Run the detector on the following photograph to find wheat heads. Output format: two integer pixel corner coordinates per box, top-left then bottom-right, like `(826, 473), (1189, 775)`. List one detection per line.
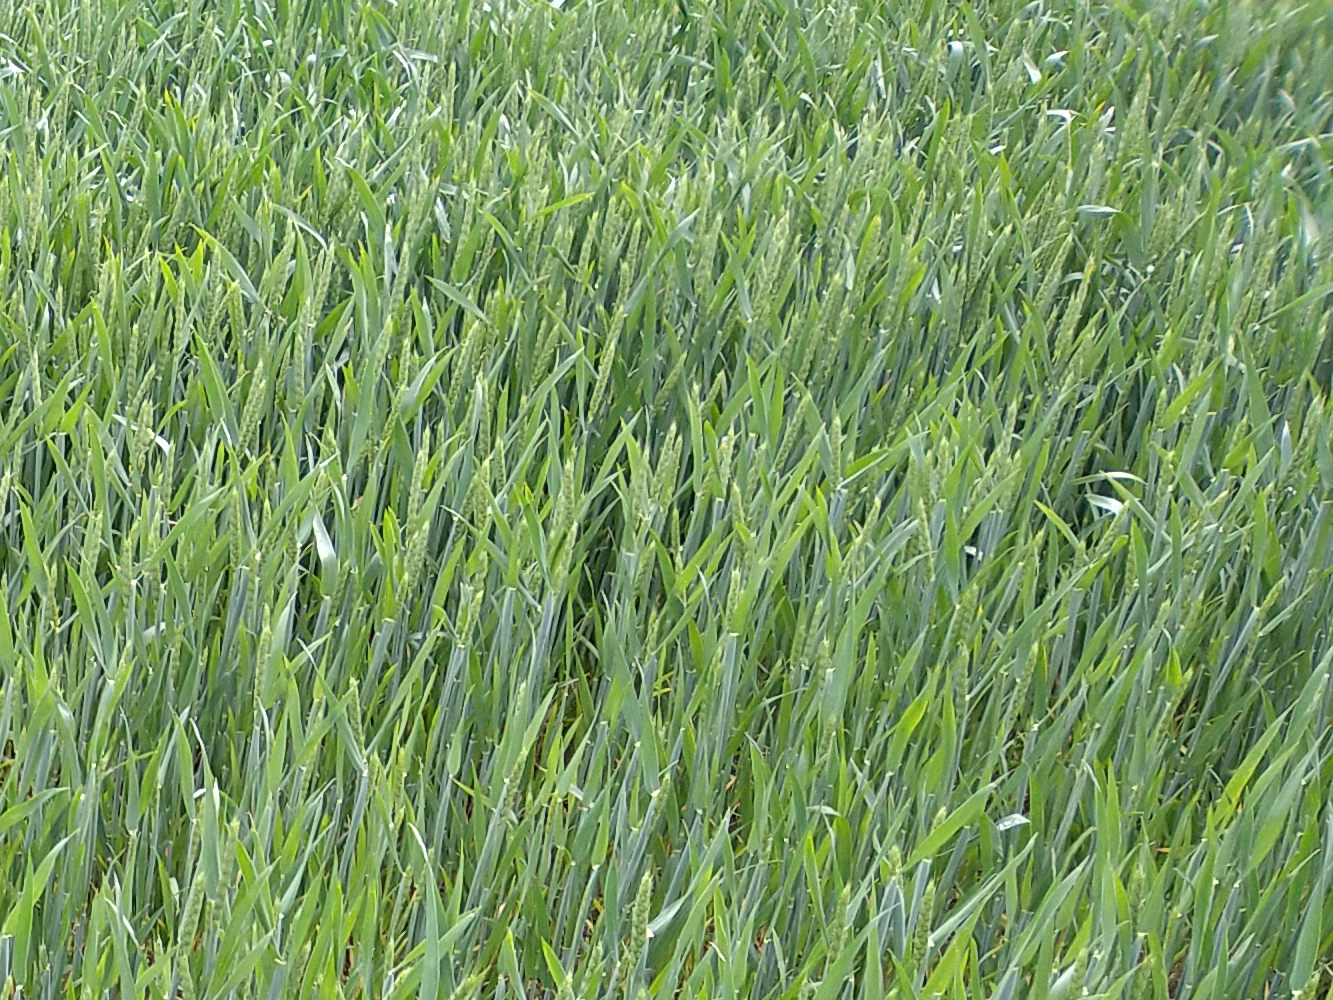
(547, 51), (564, 104)
(589, 68), (601, 112)
(488, 288), (503, 356)
(389, 244), (411, 328)
(541, 7), (552, 72)
(476, 227), (498, 291)
(551, 845), (562, 899)
(6, 286), (21, 326)
(272, 346), (287, 426)
(249, 557), (259, 621)
(662, 281), (677, 338)
(405, 533), (418, 575)
(215, 111), (229, 177)
(97, 511), (112, 580)
(757, 214), (792, 329)
(449, 319), (484, 409)
(422, 424), (429, 463)
(181, 26), (189, 48)
(1033, 235), (1072, 310)
(911, 520), (921, 570)
(457, 192), (478, 259)
(53, 291), (64, 385)
(850, 76), (869, 115)
(282, 943), (309, 1000)
(771, 232), (800, 310)
(0, 569), (8, 615)
(555, 225), (577, 295)
(1223, 420), (1251, 475)
(66, 25), (78, 74)
(847, 198), (870, 249)
(725, 568), (741, 630)
(230, 492), (244, 582)
(920, 453), (934, 503)
(416, 976), (479, 1000)
(328, 623), (338, 674)
(369, 750), (378, 791)
(231, 191), (243, 252)
(82, 0), (93, 54)
(654, 420), (676, 514)
(135, 291), (155, 346)
(817, 315), (848, 385)
(126, 226), (134, 264)
(21, 170), (46, 272)
(541, 224), (564, 278)
(168, 178), (179, 214)
(913, 881), (934, 980)
(1271, 264), (1292, 325)
(827, 198), (848, 277)
(710, 371), (722, 404)
(525, 794), (533, 842)
(799, 281), (845, 376)
(1150, 388), (1168, 442)
(794, 620), (807, 664)
(350, 679), (365, 759)
(816, 168), (840, 242)
(1278, 400), (1326, 506)
(967, 466), (999, 520)
(122, 537), (133, 608)
(28, 91), (42, 124)
(652, 352), (689, 413)
(906, 446), (918, 518)
(771, 392), (810, 480)
(280, 0), (297, 64)
(25, 137), (32, 184)
(175, 955), (194, 1000)
(122, 323), (140, 409)
(752, 314), (774, 355)
(837, 481), (861, 531)
(407, 62), (431, 142)
(819, 712), (836, 762)
(870, 466), (878, 523)
(494, 434), (505, 490)
(1186, 553), (1207, 585)
(403, 340), (414, 385)
(730, 0), (759, 37)
(11, 654), (21, 711)
(1153, 212), (1174, 256)
(998, 647), (1038, 743)
(345, 433), (373, 478)
(333, 558), (349, 619)
(578, 943), (602, 1000)
(262, 495), (268, 529)
(163, 445), (175, 509)
(939, 265), (967, 351)
(212, 159), (242, 222)
(238, 970), (250, 1000)
(312, 249), (325, 288)
(126, 26), (139, 75)
(689, 0), (717, 86)
(82, 418), (91, 475)
(479, 380), (486, 458)
(31, 346), (40, 416)
(701, 648), (721, 721)
(1169, 42), (1186, 72)
(954, 651), (967, 725)
(548, 976), (572, 1000)
(740, 549), (754, 607)
(967, 217), (988, 284)
(891, 385), (914, 446)
(935, 159), (948, 229)
(1139, 12), (1156, 58)
(1163, 70), (1201, 150)
(723, 430), (734, 492)
(383, 388), (411, 444)
(1037, 189), (1058, 241)
(75, 240), (89, 319)
(77, 324), (87, 373)
(462, 122), (477, 185)
(89, 25), (99, 91)
(648, 772), (668, 827)
(420, 171), (453, 239)
(637, 542), (652, 593)
(1167, 250), (1186, 332)
(1158, 453), (1177, 515)
(215, 194), (234, 247)
(1245, 264), (1270, 343)
(381, 939), (395, 990)
(729, 481), (745, 524)
(175, 280), (185, 363)
(528, 188), (547, 265)
(733, 70), (755, 91)
(0, 977), (14, 1000)
(201, 17), (214, 63)
(19, 318), (28, 371)
(408, 449), (423, 518)
(775, 317), (800, 375)
(808, 598), (825, 660)
(254, 624), (270, 725)
(545, 789), (560, 841)
(586, 314), (622, 421)
(9, 357), (29, 413)
(920, 506), (937, 584)
(578, 210), (598, 289)
(630, 216), (639, 294)
(305, 714), (323, 801)
(499, 752), (524, 819)
(325, 152), (346, 212)
(309, 245), (341, 320)
(674, 508), (680, 556)
(992, 21), (1022, 74)
(408, 522), (431, 589)
(234, 383), (262, 455)
(420, 851), (430, 892)
(233, 105), (241, 142)
(233, 363), (248, 405)
(395, 868), (411, 914)
(313, 380), (326, 434)
(870, 133), (895, 182)
(64, 460), (76, 521)
(147, 529), (160, 603)
(164, 187), (187, 251)
(1100, 500), (1127, 557)
(518, 152), (548, 219)
(154, 510), (160, 543)
(264, 442), (275, 512)
(211, 821), (239, 929)
(831, 416), (841, 500)
(878, 233), (915, 334)
(251, 416), (258, 459)
(685, 158), (709, 212)
(821, 642), (831, 702)
(173, 872), (205, 970)
(532, 315), (550, 358)
(635, 447), (648, 519)
(1186, 282), (1222, 395)
(243, 359), (263, 404)
(964, 266), (984, 335)
(697, 175), (716, 229)
(1243, 231), (1272, 296)
(390, 575), (412, 624)
(503, 63), (519, 119)
(1004, 469), (1026, 519)
(437, 418), (443, 470)
(1201, 212), (1236, 296)
(991, 400), (1018, 469)
(452, 481), (475, 541)
(550, 493), (565, 538)
(268, 520), (283, 556)
(1250, 572), (1289, 658)
(325, 425), (337, 471)
(159, 306), (176, 375)
(1124, 523), (1139, 598)
(1277, 976), (1319, 1000)
(407, 159), (422, 239)
(136, 226), (151, 268)
(288, 512), (298, 576)
(1045, 191), (1069, 245)
(134, 401), (153, 475)
(845, 122), (873, 201)
(336, 138), (369, 236)
(474, 456), (487, 534)
(602, 262), (630, 363)
(14, 413), (26, 490)
(391, 290), (420, 354)
(206, 250), (222, 338)
(648, 609), (659, 667)
(1130, 957), (1157, 1000)
(181, 182), (205, 244)
(1177, 599), (1203, 654)
(1063, 949), (1088, 1000)
(364, 320), (392, 389)
(1051, 434), (1069, 486)
(465, 591), (484, 635)
(123, 88), (144, 165)
(42, 567), (59, 643)
(698, 219), (722, 314)
(600, 200), (617, 269)
(635, 871), (654, 987)
(86, 199), (105, 286)
(608, 955), (627, 1000)
(1046, 373), (1076, 443)
(672, 174), (687, 219)
(190, 798), (205, 868)
(559, 520), (578, 579)
(1179, 184), (1190, 233)
(1154, 669), (1194, 751)
(13, 2), (32, 37)
(906, 68), (934, 121)
(200, 443), (205, 499)
(939, 437), (953, 494)
(193, 568), (205, 610)
(251, 199), (271, 272)
(154, 454), (166, 490)
(897, 21), (911, 54)
(827, 885), (852, 978)
(291, 331), (305, 406)
(111, 23), (126, 72)
(456, 583), (471, 632)
(103, 274), (120, 327)
(57, 244), (72, 286)
(168, 623), (181, 681)
(895, 182), (926, 247)
(1069, 429), (1092, 478)
(149, 780), (158, 819)
(563, 458), (577, 520)
(396, 752), (405, 808)
(1061, 257), (1095, 363)
(1181, 253), (1206, 310)
(0, 687), (3, 749)
(201, 114), (215, 149)
(745, 439), (766, 494)
(246, 424), (260, 460)
(62, 318), (79, 372)
(271, 229), (297, 309)
(252, 503), (258, 537)
(226, 278), (250, 359)
(740, 54), (765, 101)
(444, 58), (455, 136)
(357, 350), (374, 385)
(1281, 250), (1333, 379)
(0, 472), (11, 542)
(855, 218), (883, 301)
(56, 89), (66, 141)
(1113, 72), (1153, 171)
(514, 317), (529, 379)
(771, 523), (792, 572)
(796, 976), (808, 1000)
(659, 437), (681, 528)
(31, 980), (44, 1000)
(1021, 183), (1050, 226)
(925, 124), (953, 184)
(951, 584), (981, 647)
(520, 395), (528, 459)
(538, 325), (562, 391)
(280, 155), (294, 206)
